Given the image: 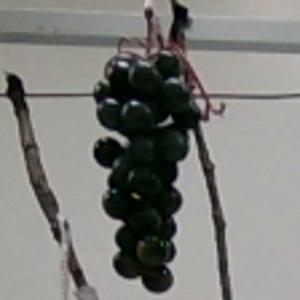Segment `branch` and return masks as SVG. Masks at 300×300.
<instances>
[{
  "label": "branch",
  "mask_w": 300,
  "mask_h": 300,
  "mask_svg": "<svg viewBox=\"0 0 300 300\" xmlns=\"http://www.w3.org/2000/svg\"><path fill=\"white\" fill-rule=\"evenodd\" d=\"M2 72L6 82L5 94L11 101L13 115L18 125V135L29 185L54 241L64 253L67 272L70 274L75 288L72 290V295L76 300H100L97 289L89 283L83 272L73 238L64 222L57 197L50 187L40 148L36 141L30 106L26 99L25 81L16 72L7 70H2Z\"/></svg>",
  "instance_id": "30e6481e"
},
{
  "label": "branch",
  "mask_w": 300,
  "mask_h": 300,
  "mask_svg": "<svg viewBox=\"0 0 300 300\" xmlns=\"http://www.w3.org/2000/svg\"><path fill=\"white\" fill-rule=\"evenodd\" d=\"M190 132L192 133L195 145L197 146L198 163L208 191L214 242L216 244V271L218 273L221 300H234L228 262V242L226 233L228 223L220 200L216 177V165L215 162L212 161L201 121L197 127L190 130Z\"/></svg>",
  "instance_id": "325d2c04"
},
{
  "label": "branch",
  "mask_w": 300,
  "mask_h": 300,
  "mask_svg": "<svg viewBox=\"0 0 300 300\" xmlns=\"http://www.w3.org/2000/svg\"><path fill=\"white\" fill-rule=\"evenodd\" d=\"M173 16L168 29V49L178 53L182 60V73L184 81L192 87V92L196 91L193 74L187 56L186 32L192 29L194 23L190 16V9L183 5L179 0H167Z\"/></svg>",
  "instance_id": "170604dd"
}]
</instances>
